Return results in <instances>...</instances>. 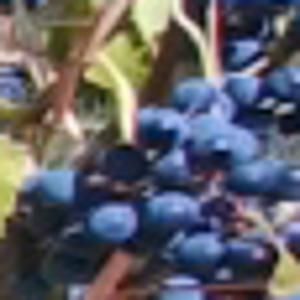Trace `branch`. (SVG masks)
Segmentation results:
<instances>
[{
    "label": "branch",
    "mask_w": 300,
    "mask_h": 300,
    "mask_svg": "<svg viewBox=\"0 0 300 300\" xmlns=\"http://www.w3.org/2000/svg\"><path fill=\"white\" fill-rule=\"evenodd\" d=\"M187 37L188 32L184 27L176 22L167 24L164 46L154 61L149 81L140 97L142 104H161L165 100Z\"/></svg>",
    "instance_id": "branch-2"
},
{
    "label": "branch",
    "mask_w": 300,
    "mask_h": 300,
    "mask_svg": "<svg viewBox=\"0 0 300 300\" xmlns=\"http://www.w3.org/2000/svg\"><path fill=\"white\" fill-rule=\"evenodd\" d=\"M130 4L131 0H108L93 28L70 54L61 71L51 113V120L55 125L65 126L70 122L80 78L94 57L93 50L106 44Z\"/></svg>",
    "instance_id": "branch-1"
},
{
    "label": "branch",
    "mask_w": 300,
    "mask_h": 300,
    "mask_svg": "<svg viewBox=\"0 0 300 300\" xmlns=\"http://www.w3.org/2000/svg\"><path fill=\"white\" fill-rule=\"evenodd\" d=\"M200 7V0H180V9L184 17L190 21L197 19V10Z\"/></svg>",
    "instance_id": "branch-3"
}]
</instances>
